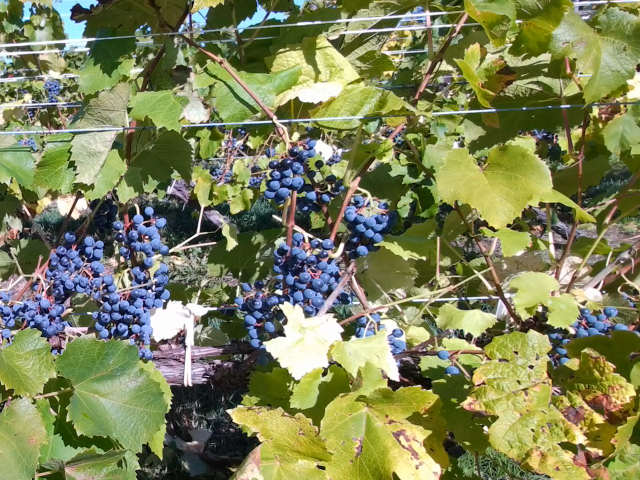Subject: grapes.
<instances>
[{"instance_id": "obj_11", "label": "grapes", "mask_w": 640, "mask_h": 480, "mask_svg": "<svg viewBox=\"0 0 640 480\" xmlns=\"http://www.w3.org/2000/svg\"><path fill=\"white\" fill-rule=\"evenodd\" d=\"M547 336L549 339H558L559 341H561L562 345H566L570 343V339L566 338L563 339V336L561 334H559L558 332H548Z\"/></svg>"}, {"instance_id": "obj_2", "label": "grapes", "mask_w": 640, "mask_h": 480, "mask_svg": "<svg viewBox=\"0 0 640 480\" xmlns=\"http://www.w3.org/2000/svg\"><path fill=\"white\" fill-rule=\"evenodd\" d=\"M304 235L295 232L292 237V246H287L286 242L280 243L273 252L275 257V265L272 270L278 274L276 279L280 282L275 284V289L281 291L288 286L287 293L281 296L271 295L264 296L261 291H257L254 299H244L237 296L234 303L241 311H247L244 317V327L249 331V343L252 348L259 352H264L266 346L260 340V331L254 328L258 319H265L264 329L269 333L276 331V324L273 322L275 312L273 306L283 304L285 301L291 305L297 303L302 306L303 311L308 317L318 314V310L326 304L323 293L335 289L342 277L339 275L340 268L336 259H329V252L335 247V242L331 239H325L322 243L319 239H312L310 246L313 249H319L321 246L324 250L318 255L306 256L307 252L302 248ZM312 265L318 271H322L319 278H312L306 272L303 265Z\"/></svg>"}, {"instance_id": "obj_6", "label": "grapes", "mask_w": 640, "mask_h": 480, "mask_svg": "<svg viewBox=\"0 0 640 480\" xmlns=\"http://www.w3.org/2000/svg\"><path fill=\"white\" fill-rule=\"evenodd\" d=\"M355 205H349L344 211V221L349 223L347 229L352 233L350 240L345 246V251L349 253L351 260L359 257H366L368 252H378L380 246L373 243H382L384 236L381 231H386L396 223L398 213L388 212L387 215L357 214V210L364 206L365 200L362 196H355Z\"/></svg>"}, {"instance_id": "obj_9", "label": "grapes", "mask_w": 640, "mask_h": 480, "mask_svg": "<svg viewBox=\"0 0 640 480\" xmlns=\"http://www.w3.org/2000/svg\"><path fill=\"white\" fill-rule=\"evenodd\" d=\"M354 296H355V293L353 291H350V292L341 291L338 295L334 297L332 304L334 306H337V305L349 306L353 302Z\"/></svg>"}, {"instance_id": "obj_7", "label": "grapes", "mask_w": 640, "mask_h": 480, "mask_svg": "<svg viewBox=\"0 0 640 480\" xmlns=\"http://www.w3.org/2000/svg\"><path fill=\"white\" fill-rule=\"evenodd\" d=\"M581 316L586 319L593 327L586 329L579 321H575L572 325V329L576 331L578 337H592L595 335H605L609 329L613 331H628L629 327L623 323H615L612 325L608 320V317L616 318L619 315V310L615 307L606 306L603 309L604 314L591 315L589 308H582L580 310Z\"/></svg>"}, {"instance_id": "obj_10", "label": "grapes", "mask_w": 640, "mask_h": 480, "mask_svg": "<svg viewBox=\"0 0 640 480\" xmlns=\"http://www.w3.org/2000/svg\"><path fill=\"white\" fill-rule=\"evenodd\" d=\"M355 334L357 338L370 337L375 335V329L370 328L366 330L365 327H357L355 329Z\"/></svg>"}, {"instance_id": "obj_4", "label": "grapes", "mask_w": 640, "mask_h": 480, "mask_svg": "<svg viewBox=\"0 0 640 480\" xmlns=\"http://www.w3.org/2000/svg\"><path fill=\"white\" fill-rule=\"evenodd\" d=\"M64 312V304H52L48 299H43L40 294H36L34 300L29 298L11 307L0 305V314H3L2 323L6 327L1 330L2 337H12V328L15 327L16 319L27 322L28 328H39L43 331V337H54L70 326L68 321H63L60 317Z\"/></svg>"}, {"instance_id": "obj_1", "label": "grapes", "mask_w": 640, "mask_h": 480, "mask_svg": "<svg viewBox=\"0 0 640 480\" xmlns=\"http://www.w3.org/2000/svg\"><path fill=\"white\" fill-rule=\"evenodd\" d=\"M77 235L73 232H66L64 241L66 245H58L56 253L49 256L50 266L45 270L46 280L54 281L52 295L54 297L65 298V292L86 293L92 295L93 299H100L102 293L108 296V301H104L101 310L93 311L92 318L97 319L95 330L103 340L109 339V330L106 324L118 323L116 327L110 328V334L115 338L127 339L134 333L140 334L138 339L144 344L151 343L153 328L151 327V316L149 310L161 308L171 297V292L165 287L169 284L168 266L160 264V268L153 273L154 290L146 288H136L130 291L131 298L121 299L117 293V286L112 275L90 277L76 275L71 277V273L82 267L83 260L80 254L84 252L90 263L92 273H103L105 265L101 264L103 259V240L95 241L91 236H85L83 245L70 249L74 245Z\"/></svg>"}, {"instance_id": "obj_3", "label": "grapes", "mask_w": 640, "mask_h": 480, "mask_svg": "<svg viewBox=\"0 0 640 480\" xmlns=\"http://www.w3.org/2000/svg\"><path fill=\"white\" fill-rule=\"evenodd\" d=\"M306 146L308 149L301 150L298 147H292L289 150V155L294 158H287L284 160L271 161L269 168L273 170L271 172V180L267 183V188L264 191V197L266 199H274L277 205H284L287 197L291 195V191H296L297 194L306 192V197H298L296 204L298 209L303 213H308L310 210L314 213L321 211V204H329L331 202V196L328 193H321L314 191L312 184H306V180L302 177H291L294 175H300L305 172V167L302 161L313 158L316 155V140L314 138H308L306 140Z\"/></svg>"}, {"instance_id": "obj_5", "label": "grapes", "mask_w": 640, "mask_h": 480, "mask_svg": "<svg viewBox=\"0 0 640 480\" xmlns=\"http://www.w3.org/2000/svg\"><path fill=\"white\" fill-rule=\"evenodd\" d=\"M144 221L145 218L142 214H136L132 217L135 229H130L128 236L121 232L115 234V241L117 243L124 241L125 244L130 247L128 249L125 246H120L118 249V253L126 261H129L133 257L134 251L142 252L146 255L142 265H135L131 269V273L136 278L131 280L133 286L148 281V275L144 271L154 266V260L152 258L155 256V251H158L161 255H166L169 252L168 245L161 244V233L159 232V229H163L168 224V219L166 217H160L155 220V225H151L150 227L142 225Z\"/></svg>"}, {"instance_id": "obj_8", "label": "grapes", "mask_w": 640, "mask_h": 480, "mask_svg": "<svg viewBox=\"0 0 640 480\" xmlns=\"http://www.w3.org/2000/svg\"><path fill=\"white\" fill-rule=\"evenodd\" d=\"M403 335L404 331L402 329H393L392 335H389L387 337V340L389 341V344L391 346V353L394 356L401 355L407 349V345L404 341L396 339L402 337Z\"/></svg>"}]
</instances>
